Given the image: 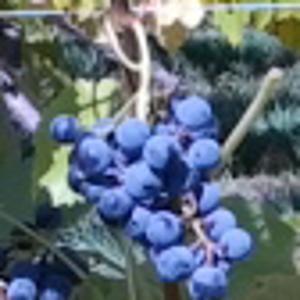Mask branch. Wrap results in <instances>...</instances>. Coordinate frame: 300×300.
Wrapping results in <instances>:
<instances>
[{"mask_svg":"<svg viewBox=\"0 0 300 300\" xmlns=\"http://www.w3.org/2000/svg\"><path fill=\"white\" fill-rule=\"evenodd\" d=\"M111 15L115 31L127 50L129 55L137 60V49L135 46V36L131 23L129 22L128 7L129 0H110Z\"/></svg>","mask_w":300,"mask_h":300,"instance_id":"30e6481e","label":"branch"},{"mask_svg":"<svg viewBox=\"0 0 300 300\" xmlns=\"http://www.w3.org/2000/svg\"><path fill=\"white\" fill-rule=\"evenodd\" d=\"M121 74V86L123 91V99L125 101L132 100L136 95L142 83V76L139 70L128 68L126 65L119 67Z\"/></svg>","mask_w":300,"mask_h":300,"instance_id":"325d2c04","label":"branch"}]
</instances>
